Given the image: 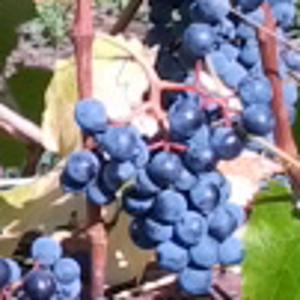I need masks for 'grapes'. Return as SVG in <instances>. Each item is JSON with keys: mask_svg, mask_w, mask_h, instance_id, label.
<instances>
[{"mask_svg": "<svg viewBox=\"0 0 300 300\" xmlns=\"http://www.w3.org/2000/svg\"><path fill=\"white\" fill-rule=\"evenodd\" d=\"M278 51L281 65V78L283 93L281 99L287 109L290 117V125H296L297 109L299 99V88L296 76L292 71L300 75V54L291 50L288 45L283 41H278Z\"/></svg>", "mask_w": 300, "mask_h": 300, "instance_id": "obj_3", "label": "grapes"}, {"mask_svg": "<svg viewBox=\"0 0 300 300\" xmlns=\"http://www.w3.org/2000/svg\"><path fill=\"white\" fill-rule=\"evenodd\" d=\"M193 16L181 44L198 60H209L226 91L236 95L243 132L271 139L277 129L274 86L262 70L259 49L264 20L262 0H194ZM79 126L93 134L109 160L81 149L67 158L61 185L69 192L86 189V199L108 205L129 177L125 212L134 220L127 237L141 250L156 249L157 265L179 271L178 287L189 296H205L213 266H240L246 248L233 237L245 225L246 209L228 200L231 183L217 167L244 150L262 154L264 145L230 125H211L194 92H176L167 108L138 102L109 123L107 105L97 95L73 107Z\"/></svg>", "mask_w": 300, "mask_h": 300, "instance_id": "obj_1", "label": "grapes"}, {"mask_svg": "<svg viewBox=\"0 0 300 300\" xmlns=\"http://www.w3.org/2000/svg\"><path fill=\"white\" fill-rule=\"evenodd\" d=\"M271 4V14L275 16V27L278 36L283 38L285 32L290 30L297 17L296 0H269Z\"/></svg>", "mask_w": 300, "mask_h": 300, "instance_id": "obj_4", "label": "grapes"}, {"mask_svg": "<svg viewBox=\"0 0 300 300\" xmlns=\"http://www.w3.org/2000/svg\"><path fill=\"white\" fill-rule=\"evenodd\" d=\"M29 256L40 266L26 275L15 257H0V288L25 277L17 300H82L84 265L75 255H65L59 238L41 236L29 245Z\"/></svg>", "mask_w": 300, "mask_h": 300, "instance_id": "obj_2", "label": "grapes"}]
</instances>
